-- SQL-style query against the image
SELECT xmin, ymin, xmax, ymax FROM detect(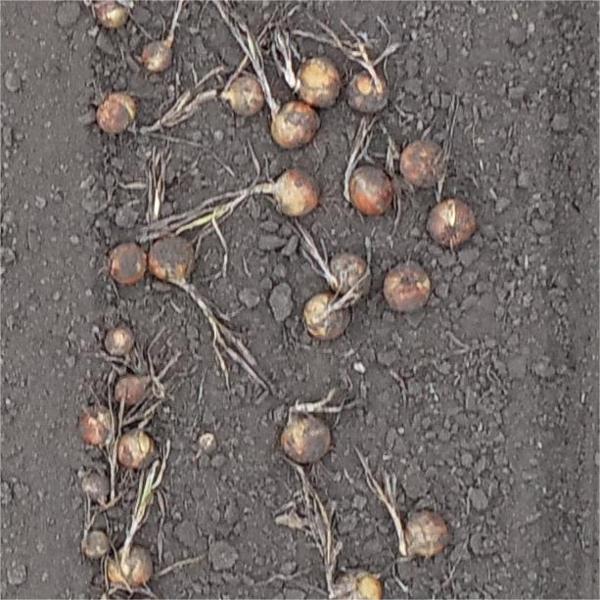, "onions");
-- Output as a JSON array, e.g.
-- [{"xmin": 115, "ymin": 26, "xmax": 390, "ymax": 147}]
[
  {"xmin": 140, "ymin": 40, "xmax": 171, "ymax": 72},
  {"xmin": 383, "ymin": 262, "xmax": 430, "ymax": 310},
  {"xmin": 105, "ymin": 243, "xmax": 146, "ymax": 286},
  {"xmin": 79, "ymin": 467, "xmax": 107, "ymax": 501},
  {"xmin": 399, "ymin": 141, "xmax": 440, "ymax": 188},
  {"xmin": 404, "ymin": 510, "xmax": 449, "ymax": 558},
  {"xmin": 81, "ymin": 529, "xmax": 108, "ymax": 557},
  {"xmin": 96, "ymin": 91, "xmax": 137, "ymax": 132},
  {"xmin": 103, "ymin": 325, "xmax": 133, "ymax": 354},
  {"xmin": 345, "ymin": 67, "xmax": 387, "ymax": 111},
  {"xmin": 331, "ymin": 570, "xmax": 381, "ymax": 600},
  {"xmin": 428, "ymin": 198, "xmax": 474, "ymax": 245},
  {"xmin": 327, "ymin": 251, "xmax": 371, "ymax": 298},
  {"xmin": 296, "ymin": 57, "xmax": 340, "ymax": 105},
  {"xmin": 348, "ymin": 166, "xmax": 393, "ymax": 214},
  {"xmin": 110, "ymin": 546, "xmax": 152, "ymax": 588},
  {"xmin": 274, "ymin": 165, "xmax": 318, "ymax": 215},
  {"xmin": 77, "ymin": 408, "xmax": 110, "ymax": 446},
  {"xmin": 279, "ymin": 414, "xmax": 329, "ymax": 462},
  {"xmin": 112, "ymin": 372, "xmax": 148, "ymax": 409},
  {"xmin": 303, "ymin": 292, "xmax": 351, "ymax": 338},
  {"xmin": 93, "ymin": 0, "xmax": 128, "ymax": 28},
  {"xmin": 223, "ymin": 75, "xmax": 262, "ymax": 114},
  {"xmin": 114, "ymin": 431, "xmax": 153, "ymax": 467},
  {"xmin": 272, "ymin": 103, "xmax": 320, "ymax": 149},
  {"xmin": 149, "ymin": 238, "xmax": 193, "ymax": 284}
]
